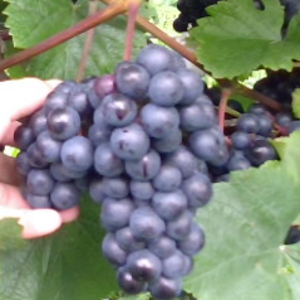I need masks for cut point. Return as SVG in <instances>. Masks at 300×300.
I'll use <instances>...</instances> for the list:
<instances>
[{"instance_id": "6a23745f", "label": "cut point", "mask_w": 300, "mask_h": 300, "mask_svg": "<svg viewBox=\"0 0 300 300\" xmlns=\"http://www.w3.org/2000/svg\"><path fill=\"white\" fill-rule=\"evenodd\" d=\"M138 17L139 8L137 6H129V14L127 15V26L124 35L123 61H131L133 58V40L137 28Z\"/></svg>"}]
</instances>
